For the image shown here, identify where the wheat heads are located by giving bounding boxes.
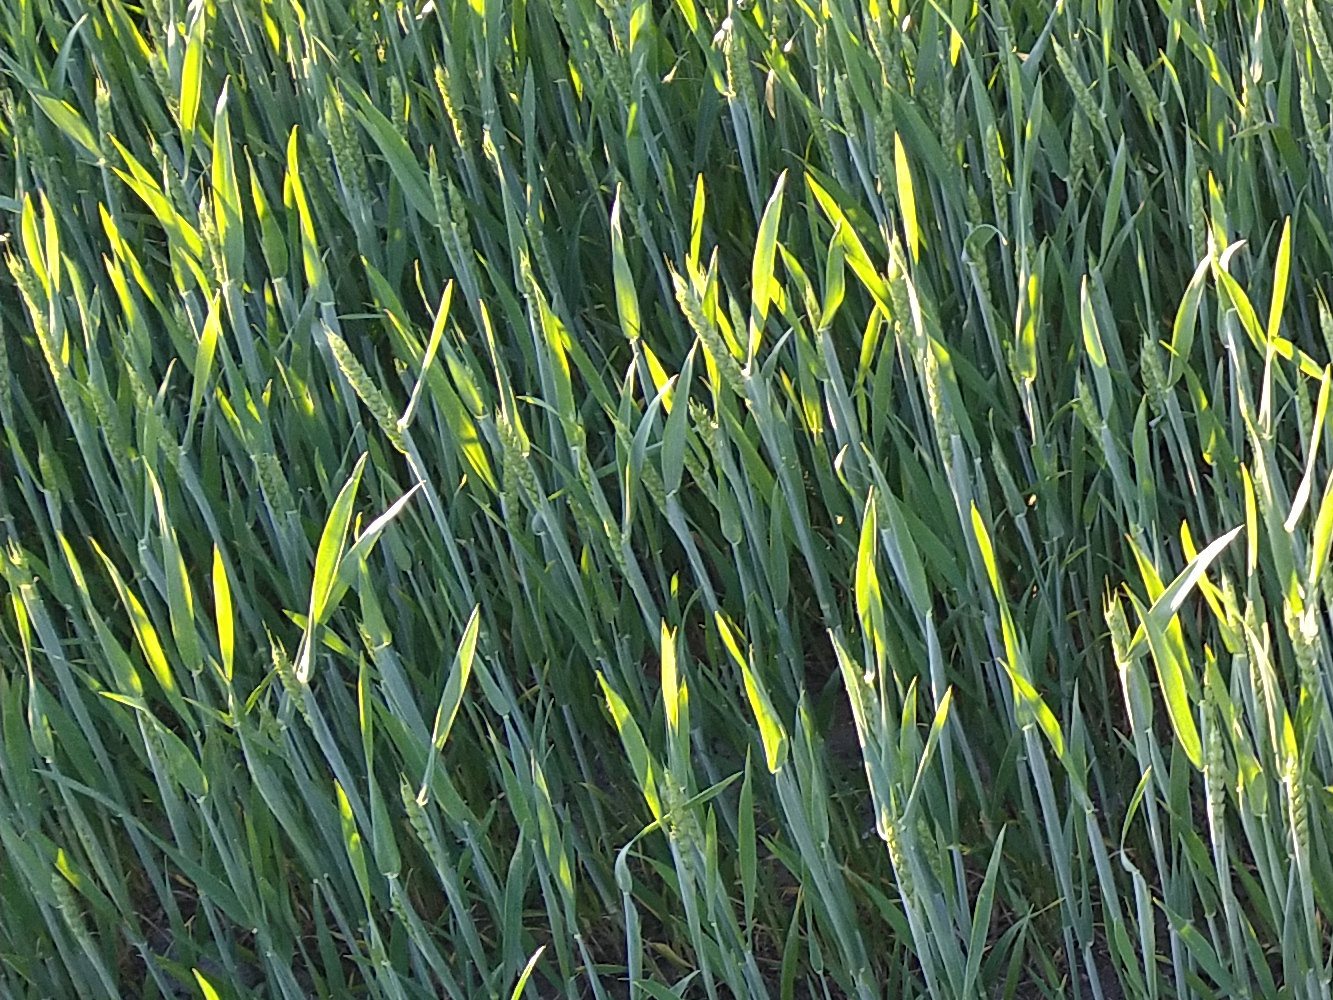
[609,418,667,502]
[1289,607,1323,693]
[1300,77,1330,171]
[38,451,58,503]
[939,90,959,167]
[1225,585,1243,645]
[391,890,414,933]
[809,103,834,160]
[271,642,306,714]
[10,256,45,312]
[965,181,983,226]
[1207,721,1228,820]
[155,149,187,215]
[1202,677,1218,720]
[1144,334,1167,386]
[500,451,521,531]
[834,72,857,136]
[134,704,170,777]
[541,0,573,42]
[149,53,177,118]
[986,128,1008,217]
[666,777,691,868]
[567,493,589,542]
[855,666,878,729]
[138,0,160,35]
[389,77,405,133]
[1027,237,1036,272]
[574,146,598,187]
[355,0,376,54]
[309,141,342,202]
[999,0,1016,49]
[138,0,169,23]
[1253,480,1267,520]
[772,0,787,38]
[917,822,946,879]
[467,53,479,94]
[735,34,757,116]
[880,805,914,894]
[868,16,909,100]
[426,155,450,238]
[1297,373,1316,429]
[1141,355,1160,412]
[1008,345,1021,383]
[1129,44,1164,121]
[614,172,639,227]
[94,86,125,199]
[1079,377,1102,431]
[1087,256,1103,310]
[519,254,543,343]
[1188,177,1206,257]
[673,442,716,497]
[326,107,355,197]
[1247,606,1272,697]
[574,438,595,494]
[174,302,201,348]
[1070,108,1083,184]
[578,0,628,39]
[726,36,738,94]
[685,395,724,459]
[447,172,474,272]
[435,64,471,148]
[0,321,14,411]
[318,321,412,451]
[926,356,954,462]
[27,127,60,200]
[1248,640,1265,704]
[6,99,31,150]
[973,253,991,300]
[340,99,366,206]
[1052,32,1108,132]
[492,415,541,499]
[677,789,703,851]
[403,777,432,855]
[1286,755,1310,850]
[1316,304,1333,396]
[1307,2,1333,92]
[886,257,917,351]
[1245,61,1261,132]
[91,381,129,468]
[498,51,515,89]
[603,507,622,567]
[522,212,560,290]
[592,23,631,101]
[672,275,746,399]
[870,114,898,209]
[32,315,81,419]
[255,446,285,515]
[816,24,828,92]
[1194,0,1218,45]
[729,297,750,348]
[1278,0,1307,50]
[1106,609,1127,658]
[806,294,824,330]
[47,871,85,944]
[125,368,183,465]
